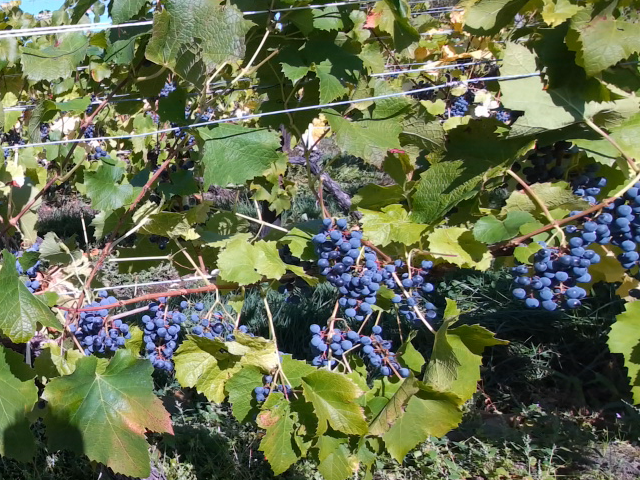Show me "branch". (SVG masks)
Masks as SVG:
<instances>
[{
  "label": "branch",
  "instance_id": "branch-1",
  "mask_svg": "<svg viewBox=\"0 0 640 480\" xmlns=\"http://www.w3.org/2000/svg\"><path fill=\"white\" fill-rule=\"evenodd\" d=\"M191 136L190 132L185 133L182 138L180 139V141L178 142L177 146L174 148V150L167 155V157L165 158L164 162L162 163V165L156 170V172L154 173L153 177L147 181L144 186L141 188V190L136 194V196L133 199L132 204L130 205L129 209L124 213V215L120 218V220L118 221L117 225L114 227L113 231L111 232L110 236H109V240L104 248V251L102 253V255L100 256V258L98 259V261L95 263L92 272L89 274L88 278H87V282L85 283L84 286L81 287L82 289V293L79 295L76 307H71V306H63V305H59L58 309L61 311H69V312H75L69 319H68V323L72 324L79 316L80 313H90V312H94L97 310H103V309H114V308H119L125 305H130L133 303H138V302H142L144 300H149V299H156V298H162V297H171V296H181V295H187V294H196L198 292H210L213 290H218V289H222V290H237L238 286L237 285H225V284H216V285H211V286H207V287H191V288H186L184 290H179V291H168V292H159V293H153V294H147V295H142L136 298H130V299H123L122 301L116 302V303H111V304H101V305H95L92 307H87V308H83L82 304L85 298V294L88 291L89 287L91 286V284L94 281V277L96 276L100 266L103 264V262L105 261L106 257L109 254V251L111 249V246L114 243V239L116 237V235L118 234V231L121 229V227L123 226V224L125 223V221L127 220V218L130 216V214L135 210V207L138 204L139 199L142 197V195L148 190V188L154 184V182L157 181L158 177L161 175V173L166 169V167L168 166V164L170 163L171 160L174 159V157L178 154V152L181 150L182 146L185 144V142L187 141V139Z\"/></svg>",
  "mask_w": 640,
  "mask_h": 480
},
{
  "label": "branch",
  "instance_id": "branch-9",
  "mask_svg": "<svg viewBox=\"0 0 640 480\" xmlns=\"http://www.w3.org/2000/svg\"><path fill=\"white\" fill-rule=\"evenodd\" d=\"M144 61H145V57H144V56H141V57L139 58V60H138V63L136 64V66H135V68H134V71H135V72H138V71L140 70V68L143 66Z\"/></svg>",
  "mask_w": 640,
  "mask_h": 480
},
{
  "label": "branch",
  "instance_id": "branch-8",
  "mask_svg": "<svg viewBox=\"0 0 640 480\" xmlns=\"http://www.w3.org/2000/svg\"><path fill=\"white\" fill-rule=\"evenodd\" d=\"M268 66L271 68V70H272V72H273L274 76H275V77H276V79H277V82H278V85H279V88H280V91H281L282 100H283V103H284V108H288V106H287V101H286V98H285L284 88H283V85H282L281 79H280V77H279V75H278L277 71L275 70V68H274L273 64L271 63V61H268Z\"/></svg>",
  "mask_w": 640,
  "mask_h": 480
},
{
  "label": "branch",
  "instance_id": "branch-6",
  "mask_svg": "<svg viewBox=\"0 0 640 480\" xmlns=\"http://www.w3.org/2000/svg\"><path fill=\"white\" fill-rule=\"evenodd\" d=\"M130 80L129 76H125L118 84L115 85V87L112 88V90L107 94V96L104 98L102 104L98 105L96 108H94L91 113L89 114L88 118L86 119V121L84 122V124L82 125V127L79 129V131L77 132V134L75 135V138H81L83 133L87 130V128L89 127V125L91 124L94 116L100 112L102 109H105L107 107L108 102L110 101V99L112 98V96L123 86L125 85L128 81Z\"/></svg>",
  "mask_w": 640,
  "mask_h": 480
},
{
  "label": "branch",
  "instance_id": "branch-7",
  "mask_svg": "<svg viewBox=\"0 0 640 480\" xmlns=\"http://www.w3.org/2000/svg\"><path fill=\"white\" fill-rule=\"evenodd\" d=\"M361 243L364 246L370 247L371 249L376 251L385 262H387V263L391 262V259L384 253V251L379 246L375 245L372 242L367 241L365 238L361 239Z\"/></svg>",
  "mask_w": 640,
  "mask_h": 480
},
{
  "label": "branch",
  "instance_id": "branch-2",
  "mask_svg": "<svg viewBox=\"0 0 640 480\" xmlns=\"http://www.w3.org/2000/svg\"><path fill=\"white\" fill-rule=\"evenodd\" d=\"M640 179V173L636 174L635 176H633L629 182L626 183V185L623 187V189H621L620 191H618L617 193H615L614 195H612L611 197L607 198L606 200L599 202L593 206H590L589 208L582 210L576 214H574L571 217H565L562 220H558V221H553L550 223H547L544 226L541 227H537L535 229L529 230L526 234H524L523 236H519V237H515L513 239H509L506 241H501L498 244H495L491 247L492 251H496L497 249H500L501 247L504 246H515L518 245L519 242L525 241L526 239H528L529 237H531L532 235H535L537 233L543 232V231H547L552 227H556V226H561L564 225L566 223H572L574 221H576L577 219L581 218L584 215H588L591 212L598 210L601 207H605L608 204L612 203L613 201L617 200L618 198H620L622 195H624L629 188L637 181Z\"/></svg>",
  "mask_w": 640,
  "mask_h": 480
},
{
  "label": "branch",
  "instance_id": "branch-5",
  "mask_svg": "<svg viewBox=\"0 0 640 480\" xmlns=\"http://www.w3.org/2000/svg\"><path fill=\"white\" fill-rule=\"evenodd\" d=\"M287 116L289 117V124H290L291 129L296 133V135L298 136V138L300 139L301 144H302V150H303V155H304V164H305V176H306V180H307V184H308V189L311 190L313 196L315 197V200H316V202H317V204L319 206V210L321 211V213L326 218H329L330 217V213L324 207L323 201L321 200V197H320L319 193L317 192L316 187H315V185L313 184V181H312V177H311V173H310L309 152H308V148H307L306 138L303 136V133L295 125V122H294V119L292 118V115L287 113Z\"/></svg>",
  "mask_w": 640,
  "mask_h": 480
},
{
  "label": "branch",
  "instance_id": "branch-4",
  "mask_svg": "<svg viewBox=\"0 0 640 480\" xmlns=\"http://www.w3.org/2000/svg\"><path fill=\"white\" fill-rule=\"evenodd\" d=\"M78 143H74L72 144V147L70 148L69 152L67 153V155L65 156V158L62 160V163L58 166L57 170L55 171V173L53 174L52 178L41 188V190L27 203V205L22 209V211L16 216L14 217L11 221H9L1 230H0V237H3L4 234L6 233V231L12 227L15 223H17L20 219H22L27 212L29 211V209L43 196V194L46 193V191L56 182V180L58 179V177L60 176L61 172L63 171V169L65 168V166L67 165L68 161L70 160V158L74 155L76 149H77Z\"/></svg>",
  "mask_w": 640,
  "mask_h": 480
},
{
  "label": "branch",
  "instance_id": "branch-3",
  "mask_svg": "<svg viewBox=\"0 0 640 480\" xmlns=\"http://www.w3.org/2000/svg\"><path fill=\"white\" fill-rule=\"evenodd\" d=\"M274 23L273 22H269L268 26L266 27L265 33L263 35V38L260 42V44L258 45L257 49L255 50V52L250 56V58L247 60V62L243 65L240 73L236 74L234 76V78L225 86V88L215 97H213L212 99H210L200 110L199 112L196 114V116L193 119V123H198L200 118L203 116V114L208 110V108L211 107V105H213L215 102H217L218 100L222 99L225 94L228 93V91L233 87V85H235L240 78L244 77L246 75V72L248 70V68L252 65V63L255 61L256 57L261 53L262 49L265 47L267 40L269 38L270 32L273 29Z\"/></svg>",
  "mask_w": 640,
  "mask_h": 480
}]
</instances>
